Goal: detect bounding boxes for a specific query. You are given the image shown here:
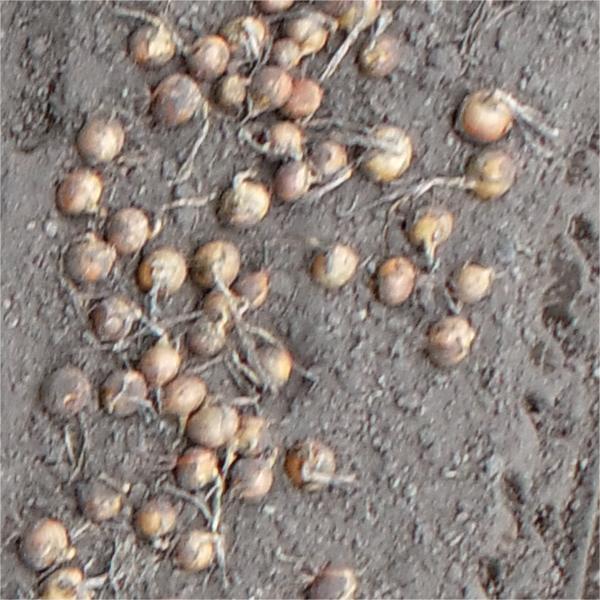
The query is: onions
[199,289,237,330]
[38,566,82,598]
[174,448,219,490]
[188,36,228,79]
[65,238,114,283]
[140,343,180,382]
[231,18,271,65]
[465,148,515,197]
[457,89,512,141]
[56,169,101,213]
[272,162,309,200]
[406,208,452,253]
[164,375,206,415]
[140,249,186,294]
[128,21,179,69]
[191,239,240,286]
[185,319,225,357]
[151,282,199,320]
[360,125,412,180]
[270,39,303,67]
[40,366,94,418]
[183,405,236,447]
[266,120,304,159]
[76,115,122,161]
[307,561,354,597]
[331,0,383,33]
[282,10,330,54]
[174,529,217,570]
[252,342,293,385]
[425,315,471,364]
[230,412,266,454]
[310,244,358,287]
[288,438,335,489]
[134,495,178,538]
[254,0,290,13]
[22,517,71,566]
[230,458,271,497]
[89,298,129,341]
[451,261,491,302]
[231,269,270,307]
[78,478,125,522]
[309,139,348,181]
[281,78,320,117]
[217,178,271,225]
[212,73,248,111]
[247,64,292,110]
[359,36,398,77]
[375,258,416,304]
[146,75,205,131]
[98,373,146,412]
[102,206,154,254]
